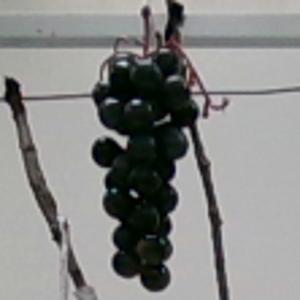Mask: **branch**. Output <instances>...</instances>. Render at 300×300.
<instances>
[{
	"instance_id": "obj_3",
	"label": "branch",
	"mask_w": 300,
	"mask_h": 300,
	"mask_svg": "<svg viewBox=\"0 0 300 300\" xmlns=\"http://www.w3.org/2000/svg\"><path fill=\"white\" fill-rule=\"evenodd\" d=\"M166 7V21L163 26L162 39L166 48L181 51L183 43L181 31L187 21L185 6L178 0H163Z\"/></svg>"
},
{
	"instance_id": "obj_2",
	"label": "branch",
	"mask_w": 300,
	"mask_h": 300,
	"mask_svg": "<svg viewBox=\"0 0 300 300\" xmlns=\"http://www.w3.org/2000/svg\"><path fill=\"white\" fill-rule=\"evenodd\" d=\"M187 130L189 138L192 142L194 159L196 160V166L207 207L210 239L213 246L215 280L218 287V300H232L223 242L224 220L221 218V212L215 194L211 161L207 156L206 147L204 146L201 138L198 121L193 126L187 127Z\"/></svg>"
},
{
	"instance_id": "obj_1",
	"label": "branch",
	"mask_w": 300,
	"mask_h": 300,
	"mask_svg": "<svg viewBox=\"0 0 300 300\" xmlns=\"http://www.w3.org/2000/svg\"><path fill=\"white\" fill-rule=\"evenodd\" d=\"M3 102L9 107L11 119L15 123L17 144L21 151L22 165L32 197L46 221L51 241L64 256L67 274L71 280L76 300H99L95 287L89 285L85 273L79 266L77 255L71 244L67 225L58 212V202L48 186L39 157V150L29 123L27 106L23 101L22 83L9 75H4Z\"/></svg>"
}]
</instances>
